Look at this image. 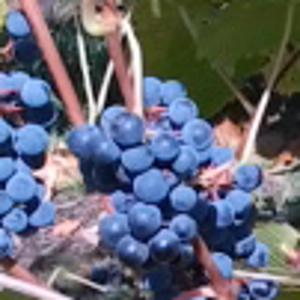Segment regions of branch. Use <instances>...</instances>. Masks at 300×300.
<instances>
[{"mask_svg":"<svg viewBox=\"0 0 300 300\" xmlns=\"http://www.w3.org/2000/svg\"><path fill=\"white\" fill-rule=\"evenodd\" d=\"M102 32L105 38L108 56L115 73L125 107L130 111L135 109L132 101L133 85L128 72V67L123 56L122 34L120 28V14L117 5L111 0L101 4Z\"/></svg>","mask_w":300,"mask_h":300,"instance_id":"branch-2","label":"branch"},{"mask_svg":"<svg viewBox=\"0 0 300 300\" xmlns=\"http://www.w3.org/2000/svg\"><path fill=\"white\" fill-rule=\"evenodd\" d=\"M196 245L200 268L209 280L219 300H236V295L230 289L228 283L223 281L213 260L211 259L210 249L206 245L205 237L203 235H199L197 237Z\"/></svg>","mask_w":300,"mask_h":300,"instance_id":"branch-3","label":"branch"},{"mask_svg":"<svg viewBox=\"0 0 300 300\" xmlns=\"http://www.w3.org/2000/svg\"><path fill=\"white\" fill-rule=\"evenodd\" d=\"M25 20L44 59L53 81V87L62 103L65 117L75 126L84 122L78 95L68 77L63 57L48 27L37 0H19Z\"/></svg>","mask_w":300,"mask_h":300,"instance_id":"branch-1","label":"branch"}]
</instances>
